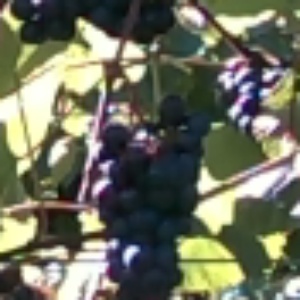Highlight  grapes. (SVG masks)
<instances>
[{
    "label": "grapes",
    "mask_w": 300,
    "mask_h": 300,
    "mask_svg": "<svg viewBox=\"0 0 300 300\" xmlns=\"http://www.w3.org/2000/svg\"><path fill=\"white\" fill-rule=\"evenodd\" d=\"M12 13L25 20L21 35L25 42L38 45L47 35L65 41L75 31L74 18L85 16L109 36H116L123 23L125 0H11Z\"/></svg>",
    "instance_id": "obj_2"
},
{
    "label": "grapes",
    "mask_w": 300,
    "mask_h": 300,
    "mask_svg": "<svg viewBox=\"0 0 300 300\" xmlns=\"http://www.w3.org/2000/svg\"><path fill=\"white\" fill-rule=\"evenodd\" d=\"M174 12L164 0H149L143 8L142 21L136 31L140 43H149L157 34H163L174 27Z\"/></svg>",
    "instance_id": "obj_3"
},
{
    "label": "grapes",
    "mask_w": 300,
    "mask_h": 300,
    "mask_svg": "<svg viewBox=\"0 0 300 300\" xmlns=\"http://www.w3.org/2000/svg\"><path fill=\"white\" fill-rule=\"evenodd\" d=\"M158 126L105 124L94 147L100 175L90 186L109 242L108 274L120 282L119 300H169L182 273L175 237L198 236L201 138L212 126L203 110L186 113L182 98L165 96Z\"/></svg>",
    "instance_id": "obj_1"
}]
</instances>
